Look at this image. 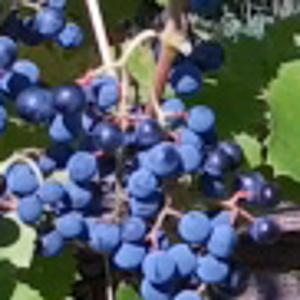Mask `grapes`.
<instances>
[{"label":"grapes","instance_id":"grapes-1","mask_svg":"<svg viewBox=\"0 0 300 300\" xmlns=\"http://www.w3.org/2000/svg\"><path fill=\"white\" fill-rule=\"evenodd\" d=\"M66 8L67 0H44L36 16L12 13L0 36V135L9 100L21 120L45 122L54 142L35 160L6 167L15 213L35 224L43 208L54 212L34 243L42 260L59 256L67 243L79 244L91 255L113 253L119 271H135L145 300H198L185 282L192 274L204 284H222L231 275L229 259L240 247L235 215L227 207L182 211L164 180L180 169L203 173V192L220 197L243 148L214 128L212 105L170 98L154 117L144 105L128 104V90L107 68L74 84L42 82V68L18 59L19 47L52 39L60 48H79L84 30L64 20Z\"/></svg>","mask_w":300,"mask_h":300},{"label":"grapes","instance_id":"grapes-2","mask_svg":"<svg viewBox=\"0 0 300 300\" xmlns=\"http://www.w3.org/2000/svg\"><path fill=\"white\" fill-rule=\"evenodd\" d=\"M221 64V46L216 42H203L173 66L169 72V84L177 95L193 96L200 90L205 72H212Z\"/></svg>","mask_w":300,"mask_h":300},{"label":"grapes","instance_id":"grapes-3","mask_svg":"<svg viewBox=\"0 0 300 300\" xmlns=\"http://www.w3.org/2000/svg\"><path fill=\"white\" fill-rule=\"evenodd\" d=\"M237 194L243 202L263 207H271L279 199L277 187L258 170H251L239 176Z\"/></svg>","mask_w":300,"mask_h":300},{"label":"grapes","instance_id":"grapes-4","mask_svg":"<svg viewBox=\"0 0 300 300\" xmlns=\"http://www.w3.org/2000/svg\"><path fill=\"white\" fill-rule=\"evenodd\" d=\"M248 238L257 247H273L282 238V227L273 217L256 216L248 224Z\"/></svg>","mask_w":300,"mask_h":300}]
</instances>
